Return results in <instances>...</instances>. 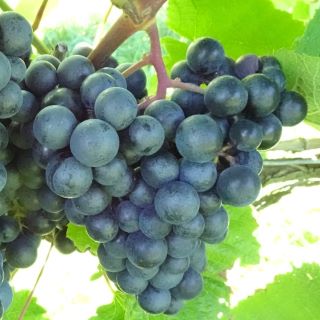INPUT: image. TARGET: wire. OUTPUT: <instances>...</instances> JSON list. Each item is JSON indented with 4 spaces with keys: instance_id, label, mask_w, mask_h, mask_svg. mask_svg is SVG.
Here are the masks:
<instances>
[{
    "instance_id": "obj_1",
    "label": "wire",
    "mask_w": 320,
    "mask_h": 320,
    "mask_svg": "<svg viewBox=\"0 0 320 320\" xmlns=\"http://www.w3.org/2000/svg\"><path fill=\"white\" fill-rule=\"evenodd\" d=\"M320 164V160L262 161V166Z\"/></svg>"
}]
</instances>
